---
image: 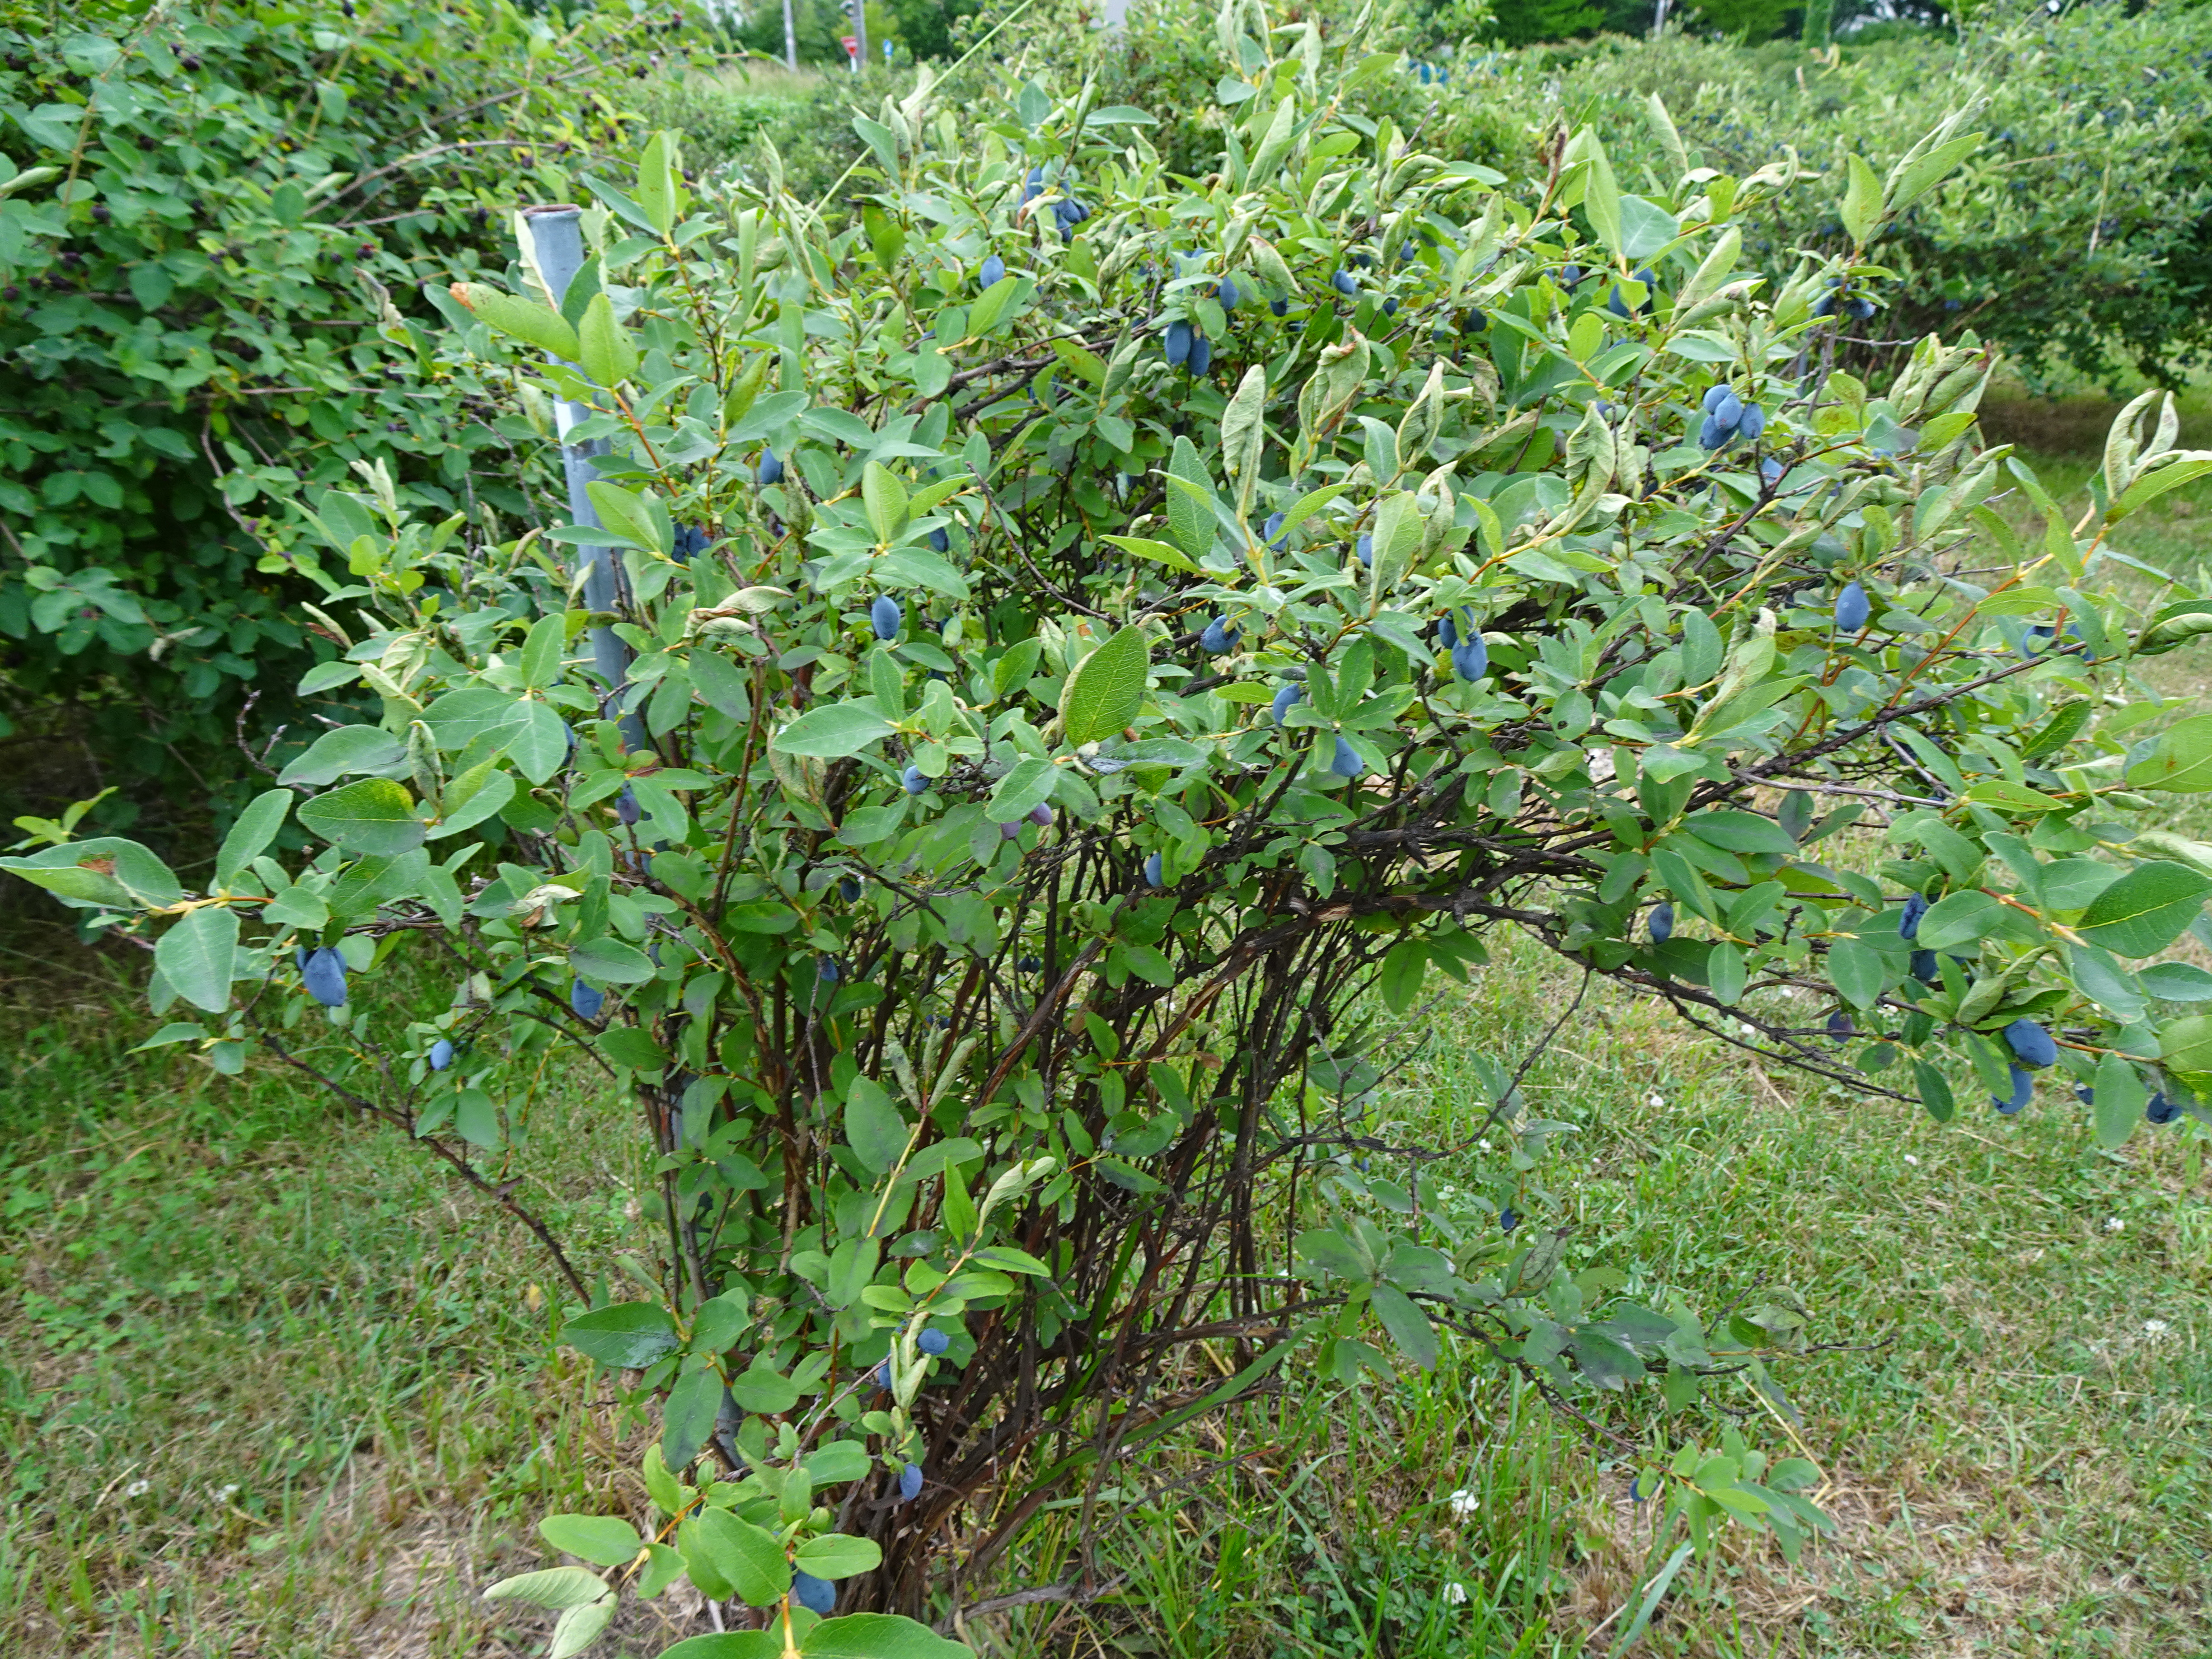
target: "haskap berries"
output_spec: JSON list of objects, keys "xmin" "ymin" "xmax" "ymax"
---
[
  {"xmin": 1030, "ymin": 801, "xmax": 1056, "ymax": 828},
  {"xmin": 1138, "ymin": 265, "xmax": 1146, "ymax": 277},
  {"xmin": 1608, "ymin": 284, "xmax": 1630, "ymax": 318},
  {"xmin": 1331, "ymin": 738, "xmax": 1362, "ymax": 777},
  {"xmin": 1815, "ymin": 293, "xmax": 1837, "ymax": 317},
  {"xmin": 1544, "ymin": 268, "xmax": 1554, "ymax": 280},
  {"xmin": 1648, "ymin": 902, "xmax": 1674, "ymax": 946},
  {"xmin": 1430, "ymin": 328, "xmax": 1443, "ymax": 343},
  {"xmin": 1992, "ymin": 1062, "xmax": 2032, "ymax": 1114},
  {"xmin": 1827, "ymin": 277, "xmax": 1842, "ymax": 288},
  {"xmin": 1400, "ymin": 240, "xmax": 1415, "ymax": 261},
  {"xmin": 1631, "ymin": 1478, "xmax": 1645, "ymax": 1502},
  {"xmin": 817, "ymin": 955, "xmax": 841, "ymax": 985},
  {"xmin": 1460, "ymin": 605, "xmax": 1476, "ymax": 628},
  {"xmin": 1355, "ymin": 1158, "xmax": 1370, "ymax": 1172},
  {"xmin": 930, "ymin": 526, "xmax": 951, "ymax": 554},
  {"xmin": 1019, "ymin": 191, "xmax": 1028, "ymax": 206},
  {"xmin": 1132, "ymin": 317, "xmax": 1146, "ymax": 330},
  {"xmin": 572, "ymin": 977, "xmax": 603, "ymax": 1020},
  {"xmin": 1699, "ymin": 403, "xmax": 1731, "ymax": 454},
  {"xmin": 1145, "ymin": 852, "xmax": 1164, "ymax": 890},
  {"xmin": 878, "ymin": 1364, "xmax": 894, "ymax": 1390},
  {"xmin": 2083, "ymin": 647, "xmax": 2096, "ymax": 663},
  {"xmin": 1029, "ymin": 376, "xmax": 1058, "ymax": 405},
  {"xmin": 1189, "ymin": 331, "xmax": 1212, "ymax": 382},
  {"xmin": 1911, "ymin": 949, "xmax": 1940, "ymax": 983},
  {"xmin": 617, "ymin": 787, "xmax": 646, "ymax": 826},
  {"xmin": 901, "ymin": 763, "xmax": 930, "ymax": 796},
  {"xmin": 2064, "ymin": 621, "xmax": 2084, "ymax": 656},
  {"xmin": 1335, "ymin": 269, "xmax": 1354, "ymax": 295},
  {"xmin": 648, "ymin": 942, "xmax": 660, "ymax": 965},
  {"xmin": 625, "ymin": 849, "xmax": 635, "ymax": 867},
  {"xmin": 674, "ymin": 522, "xmax": 705, "ymax": 561},
  {"xmin": 898, "ymin": 1462, "xmax": 925, "ymax": 1499},
  {"xmin": 1951, "ymin": 954, "xmax": 1968, "ymax": 971},
  {"xmin": 1191, "ymin": 248, "xmax": 1205, "ymax": 260},
  {"xmin": 1759, "ymin": 454, "xmax": 1786, "ymax": 485},
  {"xmin": 1265, "ymin": 510, "xmax": 1286, "ymax": 545},
  {"xmin": 980, "ymin": 254, "xmax": 1006, "ymax": 289},
  {"xmin": 1175, "ymin": 252, "xmax": 1191, "ymax": 282},
  {"xmin": 1828, "ymin": 1010, "xmax": 1852, "ymax": 1043},
  {"xmin": 1835, "ymin": 579, "xmax": 1870, "ymax": 635},
  {"xmin": 1354, "ymin": 254, "xmax": 1371, "ymax": 270},
  {"xmin": 1380, "ymin": 295, "xmax": 1399, "ymax": 318},
  {"xmin": 1060, "ymin": 182, "xmax": 1072, "ymax": 196},
  {"xmin": 643, "ymin": 838, "xmax": 668, "ymax": 876},
  {"xmin": 1714, "ymin": 386, "xmax": 1744, "ymax": 430},
  {"xmin": 1873, "ymin": 448, "xmax": 1896, "ymax": 475},
  {"xmin": 1739, "ymin": 401, "xmax": 1766, "ymax": 442},
  {"xmin": 996, "ymin": 814, "xmax": 1025, "ymax": 839},
  {"xmin": 1931, "ymin": 735, "xmax": 1941, "ymax": 742},
  {"xmin": 688, "ymin": 524, "xmax": 712, "ymax": 559},
  {"xmin": 2023, "ymin": 620, "xmax": 2054, "ymax": 660},
  {"xmin": 759, "ymin": 448, "xmax": 784, "ymax": 487},
  {"xmin": 795, "ymin": 1568, "xmax": 837, "ymax": 1614},
  {"xmin": 557, "ymin": 721, "xmax": 575, "ymax": 766},
  {"xmin": 1200, "ymin": 612, "xmax": 1251, "ymax": 654},
  {"xmin": 303, "ymin": 948, "xmax": 347, "ymax": 1007},
  {"xmin": 895, "ymin": 1320, "xmax": 906, "ymax": 1336},
  {"xmin": 1026, "ymin": 166, "xmax": 1043, "ymax": 200},
  {"xmin": 1606, "ymin": 406, "xmax": 1627, "ymax": 424},
  {"xmin": 941, "ymin": 613, "xmax": 966, "ymax": 649},
  {"xmin": 1218, "ymin": 275, "xmax": 1240, "ymax": 311},
  {"xmin": 840, "ymin": 875, "xmax": 863, "ymax": 904},
  {"xmin": 1052, "ymin": 205, "xmax": 1059, "ymax": 218},
  {"xmin": 1500, "ymin": 1208, "xmax": 1515, "ymax": 1229},
  {"xmin": 429, "ymin": 1039, "xmax": 454, "ymax": 1071},
  {"xmin": 1462, "ymin": 308, "xmax": 1487, "ymax": 335},
  {"xmin": 1031, "ymin": 957, "xmax": 1040, "ymax": 972},
  {"xmin": 1561, "ymin": 263, "xmax": 1583, "ymax": 286},
  {"xmin": 1830, "ymin": 480, "xmax": 1843, "ymax": 496},
  {"xmin": 1456, "ymin": 632, "xmax": 1488, "ymax": 684},
  {"xmin": 2146, "ymin": 1093, "xmax": 2181, "ymax": 1125},
  {"xmin": 1632, "ymin": 266, "xmax": 1656, "ymax": 289},
  {"xmin": 1439, "ymin": 612, "xmax": 1462, "ymax": 652},
  {"xmin": 1271, "ymin": 296, "xmax": 1291, "ymax": 319},
  {"xmin": 297, "ymin": 941, "xmax": 348, "ymax": 974},
  {"xmin": 1845, "ymin": 297, "xmax": 1877, "ymax": 320},
  {"xmin": 1595, "ymin": 400, "xmax": 1614, "ymax": 420},
  {"xmin": 1060, "ymin": 197, "xmax": 1082, "ymax": 226},
  {"xmin": 1928, "ymin": 797, "xmax": 1943, "ymax": 802},
  {"xmin": 2075, "ymin": 1079, "xmax": 2097, "ymax": 1104},
  {"xmin": 1898, "ymin": 893, "xmax": 1925, "ymax": 941},
  {"xmin": 1073, "ymin": 199, "xmax": 1092, "ymax": 221},
  {"xmin": 1271, "ymin": 682, "xmax": 1305, "ymax": 726},
  {"xmin": 1019, "ymin": 953, "xmax": 1031, "ymax": 972},
  {"xmin": 2006, "ymin": 1017, "xmax": 2058, "ymax": 1068},
  {"xmin": 1165, "ymin": 320, "xmax": 1193, "ymax": 369},
  {"xmin": 1610, "ymin": 338, "xmax": 1629, "ymax": 350},
  {"xmin": 926, "ymin": 1014, "xmax": 950, "ymax": 1028},
  {"xmin": 1058, "ymin": 217, "xmax": 1071, "ymax": 241},
  {"xmin": 872, "ymin": 591, "xmax": 903, "ymax": 643},
  {"xmin": 1356, "ymin": 533, "xmax": 1375, "ymax": 568},
  {"xmin": 918, "ymin": 1328, "xmax": 949, "ymax": 1355}
]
